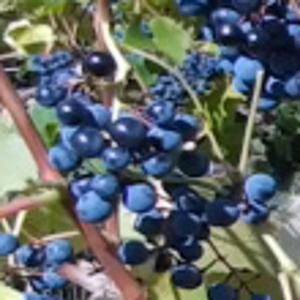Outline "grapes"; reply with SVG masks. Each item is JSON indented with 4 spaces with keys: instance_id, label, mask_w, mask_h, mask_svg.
<instances>
[{
    "instance_id": "grapes-1",
    "label": "grapes",
    "mask_w": 300,
    "mask_h": 300,
    "mask_svg": "<svg viewBox=\"0 0 300 300\" xmlns=\"http://www.w3.org/2000/svg\"><path fill=\"white\" fill-rule=\"evenodd\" d=\"M39 107L53 109L61 125L59 141L48 151L53 170L72 171L83 159H95L109 171H121L132 158V151L147 144L155 151L147 155L142 169L147 176L164 180L176 166L189 177L204 176L209 159L198 149L174 153L183 141L193 137L198 118L193 113H176L177 101L162 96L146 110V121L135 116L112 119L111 110L85 92H72L65 99L64 86L54 80L43 81L34 92Z\"/></svg>"
},
{
    "instance_id": "grapes-2",
    "label": "grapes",
    "mask_w": 300,
    "mask_h": 300,
    "mask_svg": "<svg viewBox=\"0 0 300 300\" xmlns=\"http://www.w3.org/2000/svg\"><path fill=\"white\" fill-rule=\"evenodd\" d=\"M178 11L208 21L200 37L218 44L220 74H232L238 94L251 91L259 70L264 71L258 106L274 110L281 95L300 97V12L293 0H177Z\"/></svg>"
},
{
    "instance_id": "grapes-3",
    "label": "grapes",
    "mask_w": 300,
    "mask_h": 300,
    "mask_svg": "<svg viewBox=\"0 0 300 300\" xmlns=\"http://www.w3.org/2000/svg\"><path fill=\"white\" fill-rule=\"evenodd\" d=\"M278 190V178L272 173L247 176L240 186L243 205L229 198H217L213 203L202 200L187 187H175L171 197L177 209L169 219L158 208V190L150 179H135L121 188L125 209L135 215L134 233L156 236L165 231V240L171 250L183 261L172 273V282L182 290H197L202 285L201 271L194 261L201 259V242L208 237L207 227L226 226L234 222L259 224L270 214L266 203Z\"/></svg>"
},
{
    "instance_id": "grapes-4",
    "label": "grapes",
    "mask_w": 300,
    "mask_h": 300,
    "mask_svg": "<svg viewBox=\"0 0 300 300\" xmlns=\"http://www.w3.org/2000/svg\"><path fill=\"white\" fill-rule=\"evenodd\" d=\"M14 254L20 267H39L29 277L31 292L23 296V300H59L56 291L62 290L67 284V278L57 269L74 257V249L70 242L58 239L49 244L32 246L19 245L18 238L11 231L0 232V256Z\"/></svg>"
},
{
    "instance_id": "grapes-5",
    "label": "grapes",
    "mask_w": 300,
    "mask_h": 300,
    "mask_svg": "<svg viewBox=\"0 0 300 300\" xmlns=\"http://www.w3.org/2000/svg\"><path fill=\"white\" fill-rule=\"evenodd\" d=\"M120 190L119 178L111 173L80 175L69 184V193L77 199L75 214L81 227L99 224L113 214L114 197Z\"/></svg>"
},
{
    "instance_id": "grapes-6",
    "label": "grapes",
    "mask_w": 300,
    "mask_h": 300,
    "mask_svg": "<svg viewBox=\"0 0 300 300\" xmlns=\"http://www.w3.org/2000/svg\"><path fill=\"white\" fill-rule=\"evenodd\" d=\"M117 258L129 267L144 266L149 261V251L139 240H127L117 248Z\"/></svg>"
},
{
    "instance_id": "grapes-7",
    "label": "grapes",
    "mask_w": 300,
    "mask_h": 300,
    "mask_svg": "<svg viewBox=\"0 0 300 300\" xmlns=\"http://www.w3.org/2000/svg\"><path fill=\"white\" fill-rule=\"evenodd\" d=\"M83 67L93 76L104 77L109 73H114L116 61L107 51H91L84 56Z\"/></svg>"
},
{
    "instance_id": "grapes-8",
    "label": "grapes",
    "mask_w": 300,
    "mask_h": 300,
    "mask_svg": "<svg viewBox=\"0 0 300 300\" xmlns=\"http://www.w3.org/2000/svg\"><path fill=\"white\" fill-rule=\"evenodd\" d=\"M207 297L209 300H235L237 290L227 283L215 284L208 290Z\"/></svg>"
}]
</instances>
